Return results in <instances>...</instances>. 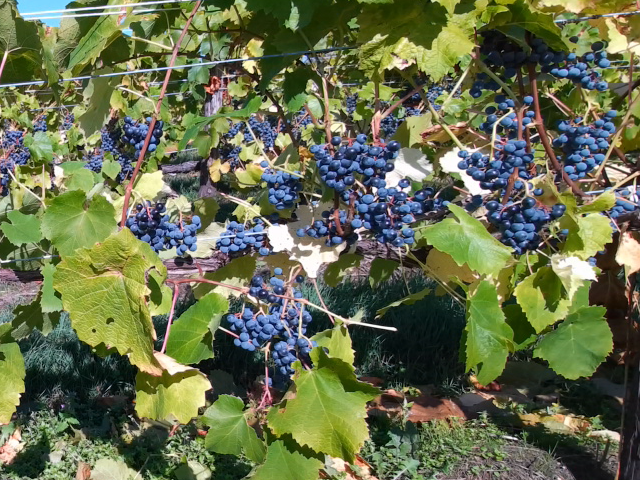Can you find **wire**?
<instances>
[{"mask_svg": "<svg viewBox=\"0 0 640 480\" xmlns=\"http://www.w3.org/2000/svg\"><path fill=\"white\" fill-rule=\"evenodd\" d=\"M313 53H314L313 49L280 51V52H274V53L262 54V55L243 56V57L233 58V59L223 60V61H203V62H196V63H182V64L170 65V66L138 68L131 71L101 73V74H93V75H79V76L68 77V78H58L57 82L70 83V82H76L81 80H95V79H103V78L133 76L136 74L147 73V72H163V71H172V70H179L184 68H198V67H205V66H226V65L241 63L245 61L264 60V59H271V58L282 57V56H293V55L313 54Z\"/></svg>", "mask_w": 640, "mask_h": 480, "instance_id": "wire-1", "label": "wire"}, {"mask_svg": "<svg viewBox=\"0 0 640 480\" xmlns=\"http://www.w3.org/2000/svg\"><path fill=\"white\" fill-rule=\"evenodd\" d=\"M635 14H640V9L617 10V11L604 12L600 14L576 15V16L556 19L555 23L562 24V23H568V22H573L578 20L602 19V18L611 17V16L635 15Z\"/></svg>", "mask_w": 640, "mask_h": 480, "instance_id": "wire-2", "label": "wire"}, {"mask_svg": "<svg viewBox=\"0 0 640 480\" xmlns=\"http://www.w3.org/2000/svg\"><path fill=\"white\" fill-rule=\"evenodd\" d=\"M59 257H60L59 253H49V254H42L33 258L1 260L0 264L1 265L28 264V263H35L44 259L59 258Z\"/></svg>", "mask_w": 640, "mask_h": 480, "instance_id": "wire-3", "label": "wire"}, {"mask_svg": "<svg viewBox=\"0 0 640 480\" xmlns=\"http://www.w3.org/2000/svg\"><path fill=\"white\" fill-rule=\"evenodd\" d=\"M47 83H48L47 79H29V80H24L19 82L0 83V88L21 87V86H26L31 84H47Z\"/></svg>", "mask_w": 640, "mask_h": 480, "instance_id": "wire-4", "label": "wire"}, {"mask_svg": "<svg viewBox=\"0 0 640 480\" xmlns=\"http://www.w3.org/2000/svg\"><path fill=\"white\" fill-rule=\"evenodd\" d=\"M238 237H239L238 233L209 234V235H204L202 237H199L197 239V242L202 243L204 241L211 240V239H229V238H238Z\"/></svg>", "mask_w": 640, "mask_h": 480, "instance_id": "wire-5", "label": "wire"}]
</instances>
